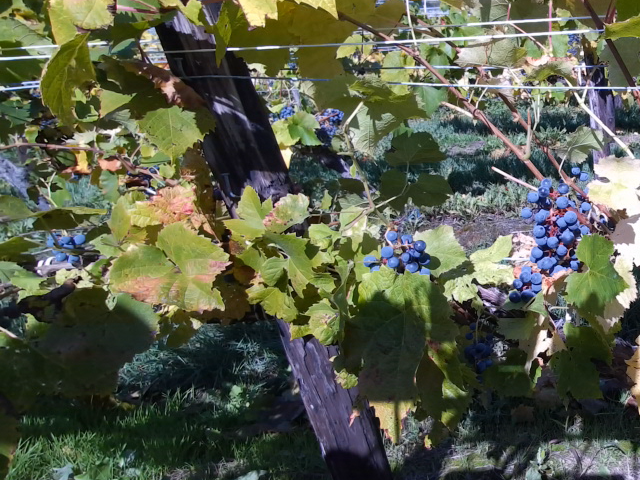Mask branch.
Wrapping results in <instances>:
<instances>
[{
  "label": "branch",
  "instance_id": "1ff4a987",
  "mask_svg": "<svg viewBox=\"0 0 640 480\" xmlns=\"http://www.w3.org/2000/svg\"><path fill=\"white\" fill-rule=\"evenodd\" d=\"M566 210H567L568 212L572 213L574 216H576V218H577V219H578V220H579V221H580V222H581L585 227H587L588 229H590V230L592 231V233H593L595 236H598V235L600 234V230H599V228H598L594 223H592L591 221L587 220V219L585 218V216H584L583 214H581V213H580V211H579L577 208H575V207H574V206H572V205H568V206L566 207Z\"/></svg>",
  "mask_w": 640,
  "mask_h": 480
},
{
  "label": "branch",
  "instance_id": "ca6c30ca",
  "mask_svg": "<svg viewBox=\"0 0 640 480\" xmlns=\"http://www.w3.org/2000/svg\"><path fill=\"white\" fill-rule=\"evenodd\" d=\"M403 15L405 17H407L408 19H410L413 22L419 23V24H428V22L421 16L415 15L414 13H412L411 11H409L408 9H405L403 11Z\"/></svg>",
  "mask_w": 640,
  "mask_h": 480
},
{
  "label": "branch",
  "instance_id": "982ccf7c",
  "mask_svg": "<svg viewBox=\"0 0 640 480\" xmlns=\"http://www.w3.org/2000/svg\"><path fill=\"white\" fill-rule=\"evenodd\" d=\"M606 43L609 47V50L611 51V54L613 55L614 59L618 63L619 67L621 68V71L623 72L627 80V83L630 86H634L636 84V81L634 80L632 73L630 72L628 66L626 65V62L624 61L623 57L619 53L614 40L612 38H608L606 40Z\"/></svg>",
  "mask_w": 640,
  "mask_h": 480
},
{
  "label": "branch",
  "instance_id": "170604dd",
  "mask_svg": "<svg viewBox=\"0 0 640 480\" xmlns=\"http://www.w3.org/2000/svg\"><path fill=\"white\" fill-rule=\"evenodd\" d=\"M336 15L339 18L345 19V20L349 21L350 23H352L353 25H356V26L368 31L369 33H372V34L376 35L381 40L389 41L391 39V36L389 34L380 31L377 27H374L371 24L366 23V22L362 21L361 19L356 18V17H354L353 15H351V14H349L347 12L338 10L336 12Z\"/></svg>",
  "mask_w": 640,
  "mask_h": 480
},
{
  "label": "branch",
  "instance_id": "325d2c04",
  "mask_svg": "<svg viewBox=\"0 0 640 480\" xmlns=\"http://www.w3.org/2000/svg\"><path fill=\"white\" fill-rule=\"evenodd\" d=\"M450 92L459 97L475 113V115L478 117V119L486 129H488L492 134L500 137L512 150H514L519 156H521L539 180H542L544 178V174L541 172L538 165L529 157L528 153L520 146H518L513 140H511L505 132L491 124L483 114L481 109L477 105H475L466 94H464L456 87H452L450 89Z\"/></svg>",
  "mask_w": 640,
  "mask_h": 480
},
{
  "label": "branch",
  "instance_id": "45aa463d",
  "mask_svg": "<svg viewBox=\"0 0 640 480\" xmlns=\"http://www.w3.org/2000/svg\"><path fill=\"white\" fill-rule=\"evenodd\" d=\"M399 49L401 51H404L406 54H409L411 57H413L418 62L423 64L425 68L436 77L438 81L449 82V79L447 77L443 76L438 70H434L433 65L425 57L420 55L416 50H413L411 47H409L406 44H401L399 46Z\"/></svg>",
  "mask_w": 640,
  "mask_h": 480
},
{
  "label": "branch",
  "instance_id": "ea751061",
  "mask_svg": "<svg viewBox=\"0 0 640 480\" xmlns=\"http://www.w3.org/2000/svg\"><path fill=\"white\" fill-rule=\"evenodd\" d=\"M582 4L584 5L586 11L590 15V18L592 19V21H593L594 25L596 26V28L598 30H600V31H603L605 29V26L600 21V18L597 15V13L595 12V10H594L592 4L590 3V1L589 0H582Z\"/></svg>",
  "mask_w": 640,
  "mask_h": 480
},
{
  "label": "branch",
  "instance_id": "30e6481e",
  "mask_svg": "<svg viewBox=\"0 0 640 480\" xmlns=\"http://www.w3.org/2000/svg\"><path fill=\"white\" fill-rule=\"evenodd\" d=\"M493 95H497L501 98L507 106L511 109V111L517 116L520 120L522 126L526 129V131L534 138V140L539 144V146L548 154L550 160L553 165L565 179L566 183L581 197L584 199H588L590 194L582 189L571 177L568 171L563 167L562 163L557 158L554 150L544 141V139L540 136V134L530 125L526 116L520 111V109L516 106V104L512 101V99L506 95L502 90H491Z\"/></svg>",
  "mask_w": 640,
  "mask_h": 480
}]
</instances>
